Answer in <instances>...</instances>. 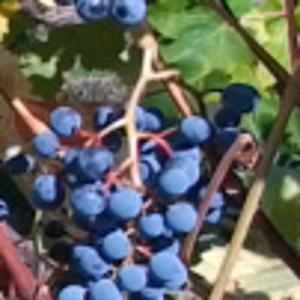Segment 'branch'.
I'll use <instances>...</instances> for the list:
<instances>
[{
  "mask_svg": "<svg viewBox=\"0 0 300 300\" xmlns=\"http://www.w3.org/2000/svg\"><path fill=\"white\" fill-rule=\"evenodd\" d=\"M211 8L233 26L242 40L251 48L263 65L268 68L275 79L284 84L286 88V94L280 101L278 114L272 123L257 169L254 173L250 193L249 187L244 183L234 168H228L225 171V177L220 183V188L226 193H229L239 207L245 206V208L242 210L237 225L234 228L224 260L213 278L210 293L208 294L209 300H219L224 293L229 272L235 265L242 241L254 213L255 217L253 218V223L256 226L258 235L267 242L279 257L288 263L294 276L300 279V255L293 250L287 239L264 210H258L256 212L280 135L289 118L291 107L296 100H300V63L294 66L290 76L285 72L282 66L273 59L270 53L257 40L243 20L234 11L220 0H213L211 2Z\"/></svg>",
  "mask_w": 300,
  "mask_h": 300,
  "instance_id": "30e6481e",
  "label": "branch"
},
{
  "mask_svg": "<svg viewBox=\"0 0 300 300\" xmlns=\"http://www.w3.org/2000/svg\"><path fill=\"white\" fill-rule=\"evenodd\" d=\"M131 35L147 50V56L155 66L158 79L174 109L183 117L193 114L196 111V106L187 98V92L183 88H179L171 66L151 28L146 24L134 26L131 29Z\"/></svg>",
  "mask_w": 300,
  "mask_h": 300,
  "instance_id": "325d2c04",
  "label": "branch"
},
{
  "mask_svg": "<svg viewBox=\"0 0 300 300\" xmlns=\"http://www.w3.org/2000/svg\"><path fill=\"white\" fill-rule=\"evenodd\" d=\"M0 259L20 294L28 300H52V291L24 262L14 243L0 224Z\"/></svg>",
  "mask_w": 300,
  "mask_h": 300,
  "instance_id": "170604dd",
  "label": "branch"
},
{
  "mask_svg": "<svg viewBox=\"0 0 300 300\" xmlns=\"http://www.w3.org/2000/svg\"><path fill=\"white\" fill-rule=\"evenodd\" d=\"M202 155L206 163V173L209 176L216 175L219 172L222 151L216 145H207L202 150Z\"/></svg>",
  "mask_w": 300,
  "mask_h": 300,
  "instance_id": "45aa463d",
  "label": "branch"
}]
</instances>
